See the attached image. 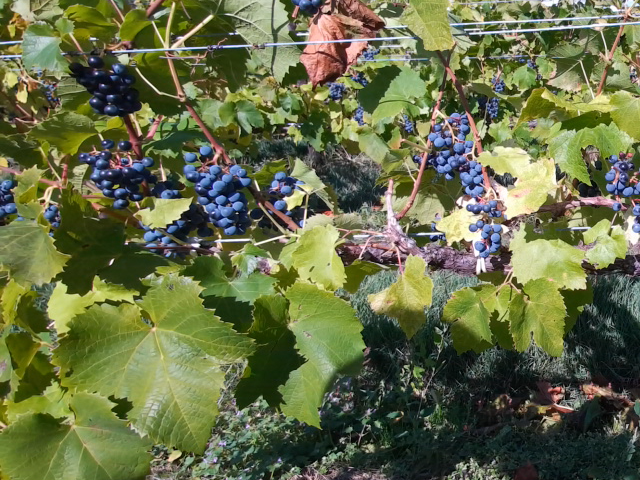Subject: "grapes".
<instances>
[{
    "label": "grapes",
    "mask_w": 640,
    "mask_h": 480,
    "mask_svg": "<svg viewBox=\"0 0 640 480\" xmlns=\"http://www.w3.org/2000/svg\"><path fill=\"white\" fill-rule=\"evenodd\" d=\"M182 173L187 181L195 183L199 203H190L189 210L184 211L179 220L168 223L165 231L182 242H186L190 232L197 228L200 237L211 238L214 230L207 227L210 222L215 227H222L226 236H243L252 224L246 194L238 191L251 185L247 171L239 165H231L226 174L218 164H212L208 172L200 173L193 165H185Z\"/></svg>",
    "instance_id": "1"
},
{
    "label": "grapes",
    "mask_w": 640,
    "mask_h": 480,
    "mask_svg": "<svg viewBox=\"0 0 640 480\" xmlns=\"http://www.w3.org/2000/svg\"><path fill=\"white\" fill-rule=\"evenodd\" d=\"M112 157V152L108 150H101L98 154H90L87 152L80 153L78 155V161L81 164H87L92 166L93 173L90 176V180L95 183V187L102 192V195L107 198H115L113 201V208L116 210H123L129 206L128 198L132 202L140 201L143 198V193L140 192L139 185L143 181H147L149 184H154L150 195L160 199H180L182 194L175 189L172 181H158L156 175H151V172L145 167H153L155 165L154 159L150 156H146L141 159V163L130 162L125 157L120 158V167L122 169H111L109 159Z\"/></svg>",
    "instance_id": "2"
},
{
    "label": "grapes",
    "mask_w": 640,
    "mask_h": 480,
    "mask_svg": "<svg viewBox=\"0 0 640 480\" xmlns=\"http://www.w3.org/2000/svg\"><path fill=\"white\" fill-rule=\"evenodd\" d=\"M88 64L83 67L79 62H71L69 68L77 81L93 95L90 105L97 115L123 118L125 114H132L143 107L139 101L141 92L130 87L136 83V77L129 74L127 66L113 63V73H105L101 71L105 63L98 56L91 57Z\"/></svg>",
    "instance_id": "3"
},
{
    "label": "grapes",
    "mask_w": 640,
    "mask_h": 480,
    "mask_svg": "<svg viewBox=\"0 0 640 480\" xmlns=\"http://www.w3.org/2000/svg\"><path fill=\"white\" fill-rule=\"evenodd\" d=\"M449 124L457 125V138L462 142H456L452 146V151L455 153L451 156L449 149H441L443 146L450 147L452 145V133L450 131H444L441 134L442 126L440 124L432 127L433 132L428 135V140L432 142V145L436 149H441L436 152V155L429 154L426 164L433 166V168L441 174H445L446 180H452L455 177L454 168L459 167V177L461 178V185L465 187V193L479 201L484 195V187L479 185L483 181L482 164L475 160L468 161L462 155H468L471 152L473 142L471 140H465L466 136L470 133V127L467 125L468 120L465 114H459L453 112L448 117Z\"/></svg>",
    "instance_id": "4"
},
{
    "label": "grapes",
    "mask_w": 640,
    "mask_h": 480,
    "mask_svg": "<svg viewBox=\"0 0 640 480\" xmlns=\"http://www.w3.org/2000/svg\"><path fill=\"white\" fill-rule=\"evenodd\" d=\"M608 162L615 167H612L609 172L605 174V180L607 182H613L618 174V181L613 183H607L605 185V190L608 193H614L615 195H621L622 197L629 198L630 196L640 194V182L632 186H625L626 182L630 179L629 171H633L635 169V164L633 162H626L623 160H618V156L616 154H612L608 157Z\"/></svg>",
    "instance_id": "5"
},
{
    "label": "grapes",
    "mask_w": 640,
    "mask_h": 480,
    "mask_svg": "<svg viewBox=\"0 0 640 480\" xmlns=\"http://www.w3.org/2000/svg\"><path fill=\"white\" fill-rule=\"evenodd\" d=\"M138 223L140 224V229L145 232L143 234V240L145 242H149L145 244L146 248H150L149 252L150 253H154V254H159L165 257V258H170L172 257L173 259H176L178 257H180L181 260H184L186 256L190 255V251L186 248H181V249H163V248H158L159 244L156 242H150V241H159V243L163 244V246L166 247H176V246H180V243H177L175 241H172V238H169L168 236H166L165 234L159 232L156 229H151V227H146L142 221H138Z\"/></svg>",
    "instance_id": "6"
},
{
    "label": "grapes",
    "mask_w": 640,
    "mask_h": 480,
    "mask_svg": "<svg viewBox=\"0 0 640 480\" xmlns=\"http://www.w3.org/2000/svg\"><path fill=\"white\" fill-rule=\"evenodd\" d=\"M478 229L483 239L490 237V246L487 248L483 241H477L475 243V251L479 253L481 258H487L492 253H496L501 246V234L502 226L499 223H495L493 226L486 224L483 221L477 220L475 223H471L468 226L470 232H476Z\"/></svg>",
    "instance_id": "7"
},
{
    "label": "grapes",
    "mask_w": 640,
    "mask_h": 480,
    "mask_svg": "<svg viewBox=\"0 0 640 480\" xmlns=\"http://www.w3.org/2000/svg\"><path fill=\"white\" fill-rule=\"evenodd\" d=\"M304 185V180L297 181L295 177H287L285 171H277L274 173V179L271 181L269 194L278 195L281 193L283 196H290L293 190L300 191V186Z\"/></svg>",
    "instance_id": "8"
},
{
    "label": "grapes",
    "mask_w": 640,
    "mask_h": 480,
    "mask_svg": "<svg viewBox=\"0 0 640 480\" xmlns=\"http://www.w3.org/2000/svg\"><path fill=\"white\" fill-rule=\"evenodd\" d=\"M16 186V180H5L0 183V217H5L17 212L14 196L10 192Z\"/></svg>",
    "instance_id": "9"
},
{
    "label": "grapes",
    "mask_w": 640,
    "mask_h": 480,
    "mask_svg": "<svg viewBox=\"0 0 640 480\" xmlns=\"http://www.w3.org/2000/svg\"><path fill=\"white\" fill-rule=\"evenodd\" d=\"M498 205H499V201L497 199H491L488 204L486 203H478L473 205L468 204L466 206V210L468 212H472L474 215H478L483 211L485 214H488L490 218H493V217L498 218L503 215V212L499 209H492V208H496Z\"/></svg>",
    "instance_id": "10"
},
{
    "label": "grapes",
    "mask_w": 640,
    "mask_h": 480,
    "mask_svg": "<svg viewBox=\"0 0 640 480\" xmlns=\"http://www.w3.org/2000/svg\"><path fill=\"white\" fill-rule=\"evenodd\" d=\"M212 153H213V148L211 146L202 145L199 150V155L201 156L200 161L202 163H205L210 159V157L212 156ZM199 155L196 152H186L183 155V159L187 163H196L198 161Z\"/></svg>",
    "instance_id": "11"
},
{
    "label": "grapes",
    "mask_w": 640,
    "mask_h": 480,
    "mask_svg": "<svg viewBox=\"0 0 640 480\" xmlns=\"http://www.w3.org/2000/svg\"><path fill=\"white\" fill-rule=\"evenodd\" d=\"M250 216H251L253 219H260V220L258 221V227H259V228H265V227H267L269 230H272V229H273V231H274V232H277V231H278V226L276 225V223H275V222H273V221H271V219H270V218H268V217H266V216H263V211H262L260 208L253 209V210L250 212Z\"/></svg>",
    "instance_id": "12"
},
{
    "label": "grapes",
    "mask_w": 640,
    "mask_h": 480,
    "mask_svg": "<svg viewBox=\"0 0 640 480\" xmlns=\"http://www.w3.org/2000/svg\"><path fill=\"white\" fill-rule=\"evenodd\" d=\"M291 3L308 13H317L318 7L322 5L321 0H291Z\"/></svg>",
    "instance_id": "13"
},
{
    "label": "grapes",
    "mask_w": 640,
    "mask_h": 480,
    "mask_svg": "<svg viewBox=\"0 0 640 480\" xmlns=\"http://www.w3.org/2000/svg\"><path fill=\"white\" fill-rule=\"evenodd\" d=\"M44 217L53 228H58V208L55 204H49L48 208L44 211Z\"/></svg>",
    "instance_id": "14"
},
{
    "label": "grapes",
    "mask_w": 640,
    "mask_h": 480,
    "mask_svg": "<svg viewBox=\"0 0 640 480\" xmlns=\"http://www.w3.org/2000/svg\"><path fill=\"white\" fill-rule=\"evenodd\" d=\"M269 202L271 205H273V207L277 208L282 214L284 215L292 214L291 210L286 209V207L288 206V201L285 200L284 198L277 199L276 197H270Z\"/></svg>",
    "instance_id": "15"
}]
</instances>
